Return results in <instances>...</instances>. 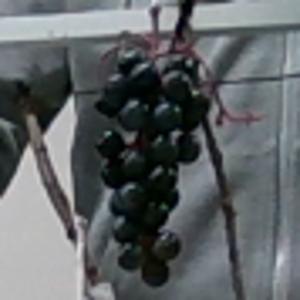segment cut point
I'll use <instances>...</instances> for the list:
<instances>
[{"instance_id":"6a23745f","label":"cut point","mask_w":300,"mask_h":300,"mask_svg":"<svg viewBox=\"0 0 300 300\" xmlns=\"http://www.w3.org/2000/svg\"><path fill=\"white\" fill-rule=\"evenodd\" d=\"M162 12H163V0H151L147 8V14L152 24L153 52L151 58H153L155 62H157L158 59L159 20Z\"/></svg>"}]
</instances>
